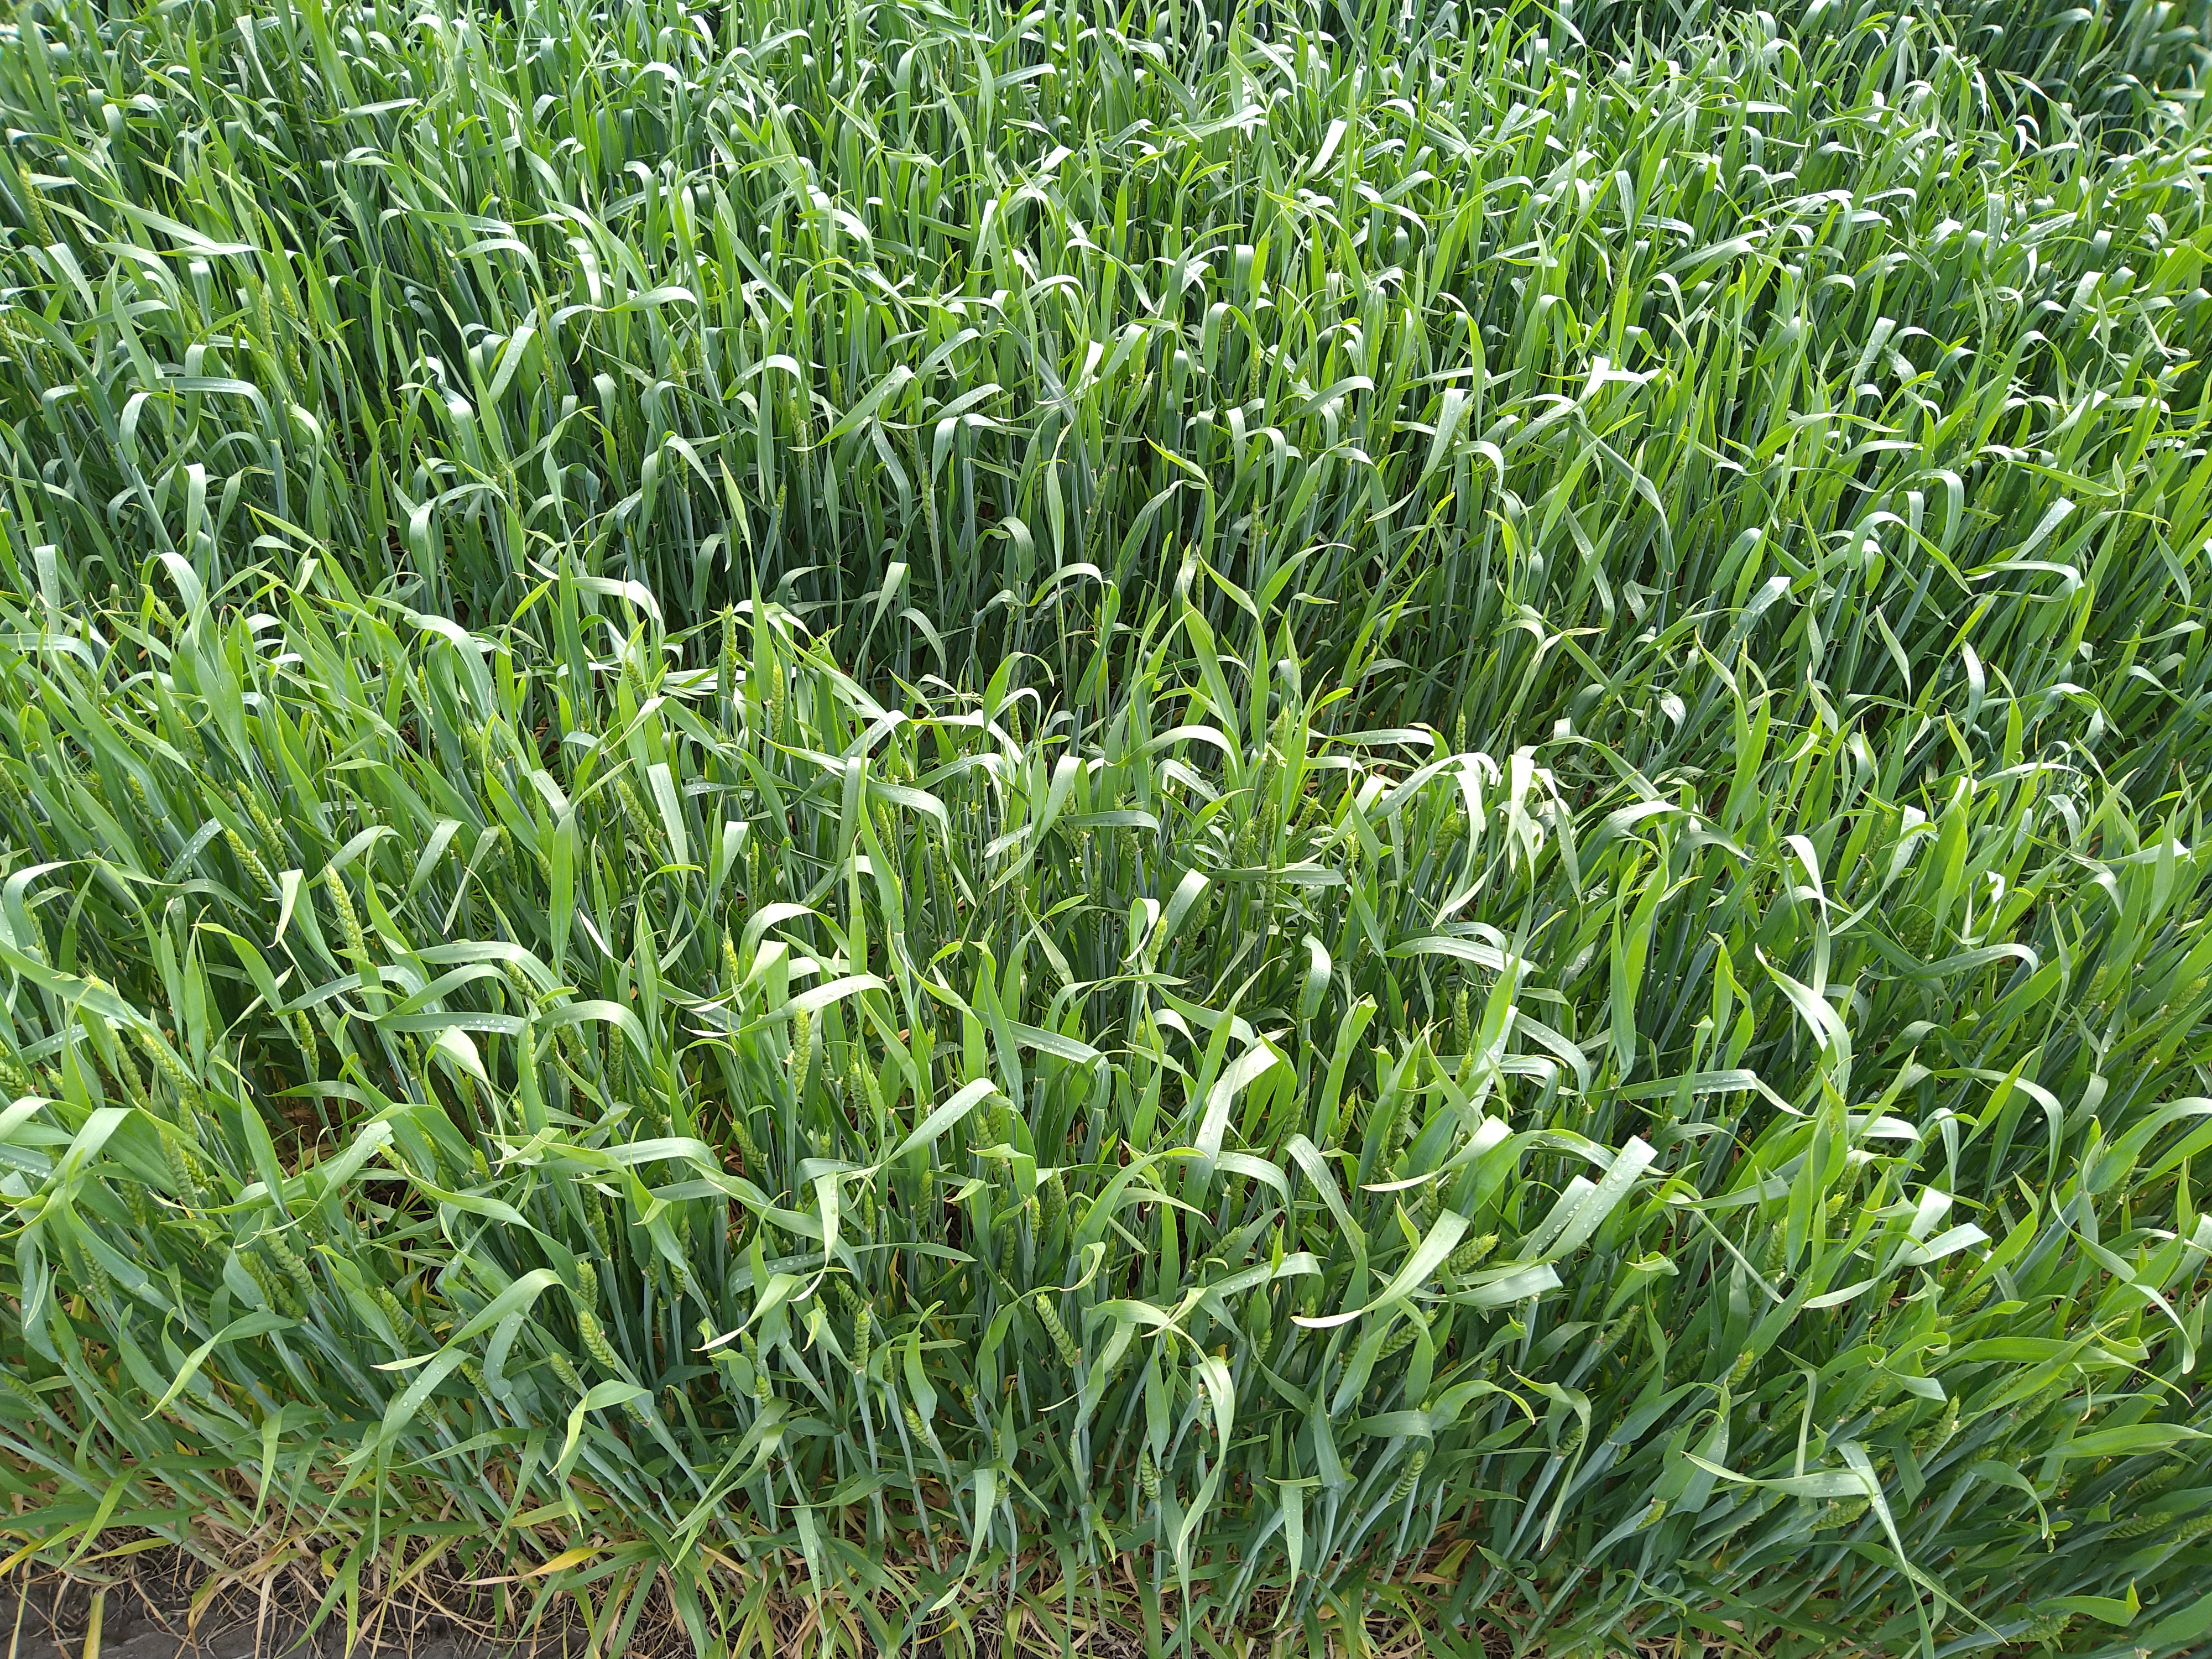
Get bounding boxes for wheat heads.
[1482,242,1503,296]
[1944,1072,1972,1105]
[788,1010,815,1090]
[1334,1092,1357,1151]
[363,1284,386,1316]
[1609,1420,1630,1463]
[494,458,506,514]
[937,260,945,289]
[1549,853,1564,896]
[1858,1399,1915,1436]
[882,764,905,823]
[643,1251,659,1287]
[507,462,519,514]
[432,237,451,295]
[1387,1449,1425,1504]
[249,804,290,872]
[776,484,786,515]
[495,173,513,237]
[142,1033,202,1105]
[1683,867,1698,918]
[1196,560,1205,613]
[2036,525,2061,572]
[1251,1327,1272,1368]
[1977,1377,2026,1410]
[1249,344,1259,416]
[1805,1501,1871,1530]
[2180,900,2198,921]
[157,600,183,641]
[814,740,826,777]
[2090,1146,2110,1179]
[1611,434,1631,489]
[45,1065,67,1095]
[1727,491,1742,548]
[991,1430,1002,1459]
[657,1301,667,1326]
[49,346,63,375]
[1102,1239,1116,1273]
[756,1375,772,1408]
[837,1282,870,1316]
[1548,1153,1564,1178]
[19,168,55,248]
[182,285,198,316]
[2119,1040,2161,1093]
[1455,1047,1473,1091]
[1302,1481,1319,1501]
[1229,1170,1247,1207]
[878,1345,893,1383]
[1456,712,1465,759]
[589,311,607,370]
[201,771,238,811]
[1633,502,1648,546]
[1088,871,1101,936]
[580,699,594,731]
[1965,1018,2000,1060]
[330,103,348,149]
[922,469,935,535]
[875,802,896,869]
[1586,694,1609,739]
[1217,1124,1235,1149]
[1011,841,1024,917]
[668,352,693,417]
[1056,599,1064,645]
[496,959,547,1017]
[87,773,112,801]
[1902,911,1925,947]
[814,1291,828,1322]
[236,1251,272,1316]
[1354,97,1368,129]
[381,1286,405,1341]
[1957,1446,1998,1482]
[1114,823,1122,846]
[438,223,458,254]
[1627,289,1634,311]
[730,1120,768,1176]
[59,650,94,691]
[847,1060,867,1121]
[1391,1078,1418,1170]
[1344,392,1355,429]
[1589,1010,1606,1045]
[395,1366,407,1391]
[854,1312,870,1374]
[1222,752,1231,813]
[624,1400,647,1423]
[1045,72,1057,118]
[1507,215,1517,248]
[1431,1236,1498,1280]
[1326,107,1333,123]
[78,1237,109,1300]
[1105,1337,1131,1387]
[607,1023,626,1098]
[1842,1368,1889,1420]
[252,1252,305,1323]
[559,1021,588,1081]
[257,298,275,357]
[27,254,43,286]
[848,1038,861,1062]
[510,746,522,777]
[234,779,260,808]
[946,42,954,83]
[817,303,827,340]
[326,865,369,972]
[307,286,320,336]
[977,764,986,805]
[1288,797,1319,853]
[1933,1049,1948,1065]
[1750,994,1776,1031]
[835,371,841,411]
[720,605,736,699]
[1609,250,1629,304]
[672,1219,690,1289]
[1338,1330,1362,1385]
[1845,62,1863,100]
[1379,307,1388,350]
[1920,1121,1942,1151]
[988,1104,1003,1139]
[1555,1425,1582,1455]
[1472,853,1488,881]
[679,452,688,493]
[2,1371,42,1406]
[1200,1382,1211,1408]
[2099,1154,2139,1224]
[1993,1389,2053,1438]
[974,1112,1004,1184]
[1384,238,1393,266]
[1999,1610,2072,1641]
[881,356,890,375]
[929,838,947,905]
[1731,1086,1746,1118]
[2096,485,2135,541]
[1872,1451,1892,1470]
[1919,34,1928,67]
[2112,516,2140,554]
[1249,497,1258,562]
[777,368,784,399]
[880,1208,889,1241]
[1259,710,1288,795]
[1565,125,1579,162]
[206,1022,214,1051]
[420,1392,437,1421]
[1141,825,1155,858]
[1912,917,1935,959]
[964,39,969,86]
[2104,1511,2172,1539]
[1550,448,1565,489]
[1436,814,1462,861]
[1109,289,1118,331]
[1343,837,1362,870]
[635,1082,668,1139]
[577,1312,615,1369]
[542,1021,556,1063]
[1441,401,1473,459]
[994,1188,1008,1221]
[120,1176,147,1227]
[1397,341,1416,402]
[1008,699,1022,754]
[1294,1295,1316,1350]
[1374,1310,1438,1362]
[1257,517,1264,549]
[688,1119,698,1142]
[417,665,428,707]
[2018,0,2038,51]
[434,34,458,95]
[1337,1241,1355,1292]
[1140,1451,1157,1497]
[1540,1067,1564,1120]
[1032,1294,1077,1366]
[0,769,27,809]
[685,868,694,886]
[1130,1021,1145,1076]
[1964,482,1995,548]
[111,215,126,242]
[465,1072,474,1103]
[1818,1440,1871,1462]
[1230,127,1236,172]
[1950,1280,1996,1312]
[1630,1499,1666,1530]
[1259,852,1277,933]
[1083,468,1109,560]
[1691,501,1712,561]
[378,379,388,410]
[1278,1094,1306,1160]
[1392,191,1404,233]
[244,183,264,249]
[744,317,757,362]
[1092,603,1104,641]
[1929,1316,1954,1333]
[1133,230,1140,263]
[2164,1515,2212,1541]
[722,936,736,991]
[1523,779,1543,804]
[58,1245,91,1300]
[526,794,537,823]
[1955,661,1981,709]
[919,1093,932,1125]
[707,295,716,329]
[1736,962,1756,990]
[1380,423,1395,461]
[1352,936,1374,985]
[381,647,395,683]
[2052,400,2067,455]
[1738,1492,1786,1527]
[1868,1281,1899,1314]
[2157,976,2208,1021]
[251,274,262,292]
[475,1148,495,1196]
[1661,1346,1706,1392]
[1576,1103,1588,1129]
[498,823,520,886]
[615,404,628,464]
[1452,990,1469,1061]
[1906,333,1922,367]
[1143,917,1168,978]
[1500,713,1515,747]
[1824,1095,1844,1143]
[905,1406,928,1447]
[1549,336,1562,386]
[451,835,464,868]
[525,1025,537,1082]
[1279,535,1286,557]
[2001,1448,2029,1468]
[1192,1227,1244,1275]
[108,1026,147,1102]
[1988,330,1997,361]
[1339,433,1349,481]
[306,1204,328,1245]
[1807,1194,1846,1232]
[767,661,783,744]
[22,900,51,966]
[2038,825,2058,906]
[280,281,298,332]
[1131,360,1144,402]
[176,708,204,759]
[403,1034,425,1089]
[1028,1195,1040,1241]
[1232,821,1251,870]
[178,1099,202,1162]
[2092,987,2123,1026]
[799,1178,816,1206]
[693,335,703,378]
[1802,34,1821,69]
[158,1127,197,1204]
[1294,969,1309,1040]
[1930,1395,1960,1451]
[225,827,270,891]
[1241,1289,1257,1336]
[905,409,915,464]
[864,1193,876,1239]
[622,655,645,704]
[934,64,939,83]
[2082,484,2107,519]
[550,1353,581,1387]
[803,422,815,479]
[1371,1140,1390,1181]
[1939,1431,1965,1456]
[487,856,504,911]
[1905,1428,1927,1451]
[816,1132,831,1159]
[1070,1435,1075,1465]
[626,341,645,373]
[1175,897,1211,959]
[126,773,164,831]
[264,1224,313,1293]
[1765,1398,1806,1439]
[18,316,37,341]
[1299,423,1307,453]
[1292,1172,1313,1223]
[1270,271,1279,294]
[1663,452,1686,512]
[1837,1155,1861,1198]
[740,1330,760,1366]
[422,1131,453,1187]
[1362,254,1368,269]
[706,1337,723,1373]
[33,344,57,380]
[1000,1226,1013,1279]
[869,1073,878,1088]
[1994,304,2018,337]
[1173,1310,1191,1343]
[1730,1481,1756,1509]
[104,438,120,471]
[1422,1170,1437,1241]
[1715,1350,1753,1401]
[2162,733,2177,780]
[176,1149,211,1187]
[1792,1063,1818,1103]
[190,320,206,344]
[1777,492,1789,537]
[576,1262,596,1313]
[536,849,553,890]
[1072,1208,1087,1239]
[1008,611,1013,650]
[1763,366,1776,404]
[267,749,280,791]
[1043,1170,1070,1241]
[2060,966,2109,1040]
[1111,796,1138,868]
[914,1171,933,1230]
[464,727,506,791]
[746,840,758,913]
[1263,805,1277,863]
[887,807,896,833]
[1657,1095,1673,1132]
[232,391,254,435]
[0,1061,39,1121]
[789,398,806,475]
[1949,400,1977,458]
[1148,386,1156,433]
[1780,1273,1812,1327]
[579,1170,610,1256]
[1004,6,1011,54]
[286,340,307,394]
[289,65,311,134]
[1429,530,1439,566]
[1332,247,1341,272]
[2123,1465,2179,1499]
[1730,343,1742,370]
[926,1027,936,1050]
[1899,978,1915,1000]
[0,1037,12,1056]
[296,1008,318,1072]
[1149,756,1155,781]
[540,351,558,409]
[559,73,568,106]
[374,1141,430,1197]
[993,426,1004,462]
[1220,302,1230,352]
[1519,1289,1531,1320]
[0,322,29,375]
[962,1384,976,1420]
[993,1483,1007,1509]
[1597,1300,1635,1358]
[1171,762,1189,821]
[77,223,105,273]
[510,1097,530,1135]
[1763,1217,1790,1284]
[460,1361,492,1397]
[763,1225,793,1256]
[1254,801,1270,834]
[1064,789,1084,855]
[1854,813,1894,888]
[384,466,393,499]
[1150,1132,1168,1198]
[1568,595,1591,637]
[335,348,342,388]
[900,752,913,780]
[1033,442,1041,510]
[535,1173,559,1237]
[614,780,662,856]
[625,369,636,395]
[668,40,676,60]
[1854,876,1874,910]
